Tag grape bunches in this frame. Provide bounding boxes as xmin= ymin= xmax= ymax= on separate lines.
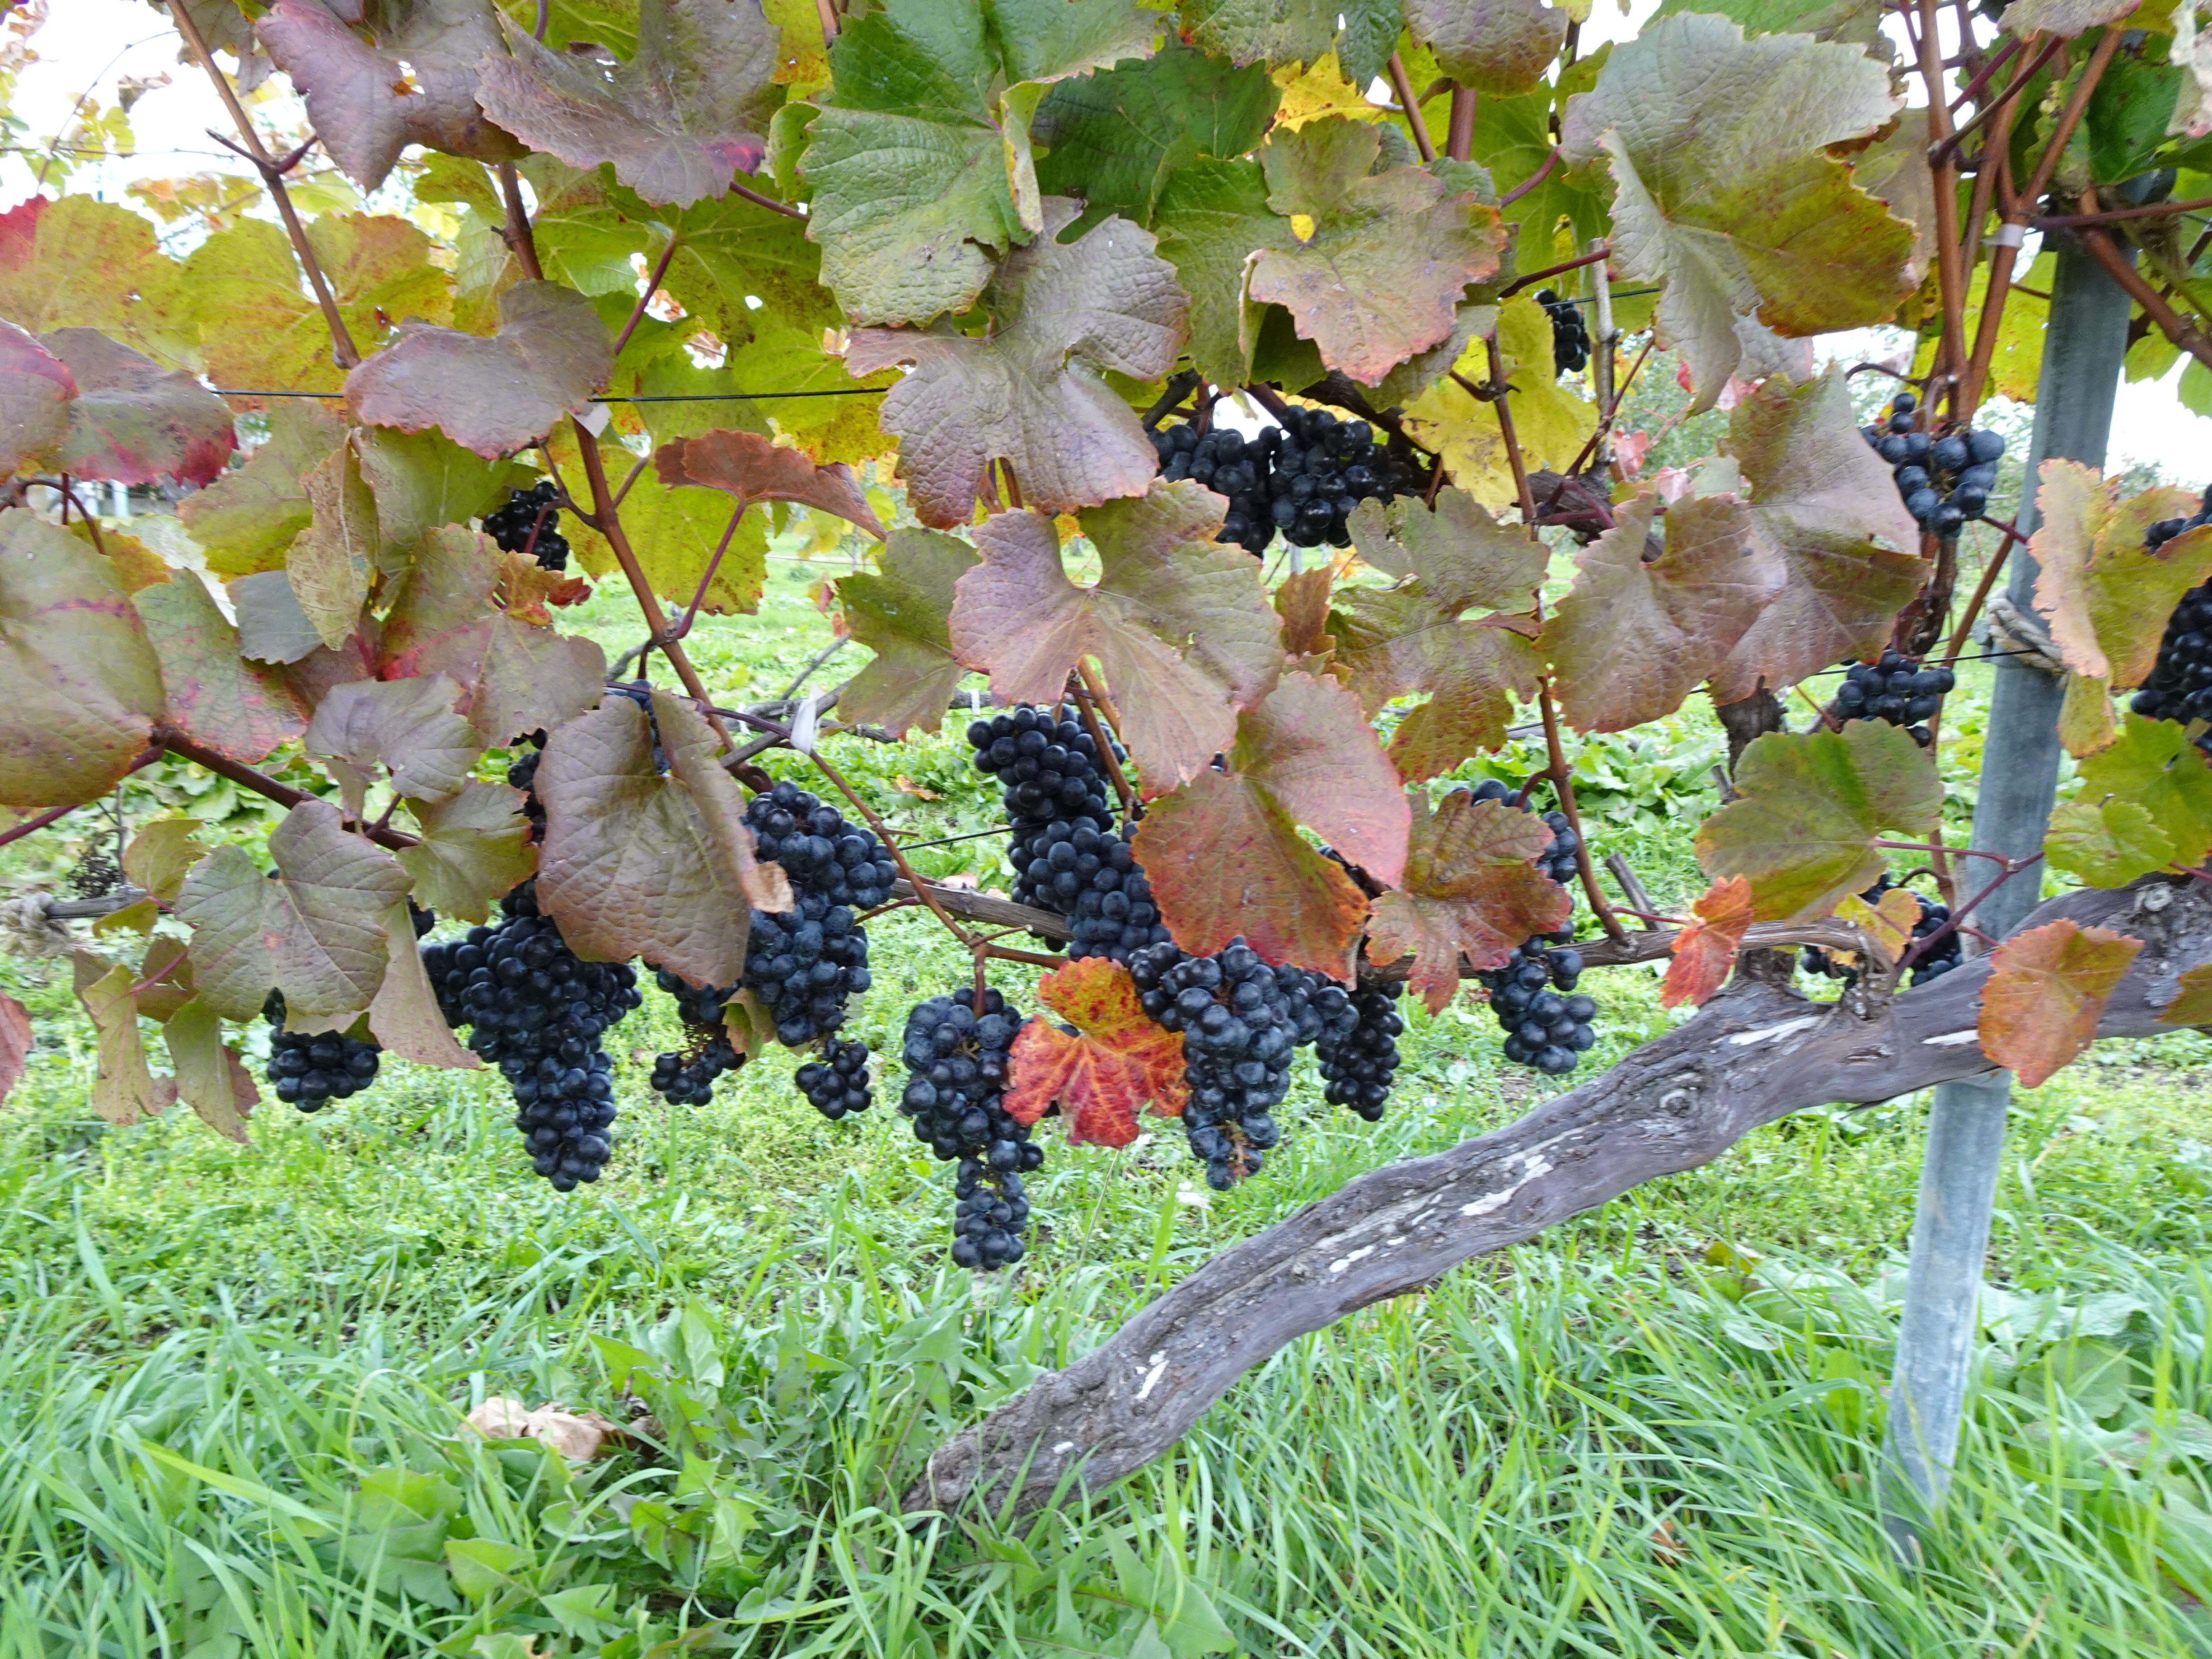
xmin=1800 ymin=872 xmax=1964 ymax=989
xmin=1280 ymin=965 xmax=1360 ymax=1048
xmin=1259 ymin=405 xmax=1432 ymax=549
xmin=448 ymin=918 xmax=642 ymax=1190
xmin=1029 ymin=817 xmax=1121 ymax=916
xmin=1441 ymin=779 xmax=1595 ymax=1077
xmin=2131 ymin=483 xmax=2212 ymax=753
xmin=739 ymin=782 xmax=898 ymax=911
xmin=1531 ymin=288 xmax=1592 ymax=378
xmin=1858 ymin=393 xmax=2005 ymax=541
xmin=421 ymin=920 xmax=520 ymax=1026
xmin=593 ymin=679 xmax=672 ymax=775
xmin=481 ymin=481 xmax=570 ymax=571
xmin=1129 ymin=935 xmax=1297 ymax=1191
xmin=259 ymin=870 xmax=434 ymax=1113
xmin=1825 ymin=644 xmax=1954 ymax=747
xmin=1315 ymin=844 xmax=1393 ymax=960
xmin=1069 ymin=820 xmax=1170 ymax=970
xmin=967 ymin=703 xmax=1127 ymax=953
xmin=1145 ymin=414 xmax=1275 ymax=559
xmin=901 ymin=988 xmax=1080 ymax=1271
xmin=642 ymin=959 xmax=746 ymax=1108
xmin=740 ymin=879 xmax=872 ymax=1120
xmin=1316 ymin=966 xmax=1404 ymax=1121
xmin=498 ymin=727 xmax=547 ymax=919
xmin=1210 ymin=750 xmax=1227 ymax=776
